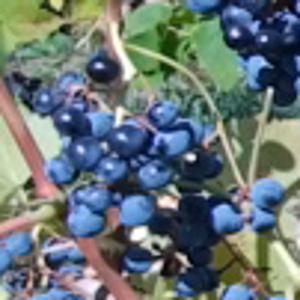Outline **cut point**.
Instances as JSON below:
<instances>
[{
    "instance_id": "1",
    "label": "cut point",
    "mask_w": 300,
    "mask_h": 300,
    "mask_svg": "<svg viewBox=\"0 0 300 300\" xmlns=\"http://www.w3.org/2000/svg\"><path fill=\"white\" fill-rule=\"evenodd\" d=\"M110 40L120 63L127 70L130 77L137 75V68L129 58L126 50L122 45V41L119 36V24L110 25Z\"/></svg>"
}]
</instances>
